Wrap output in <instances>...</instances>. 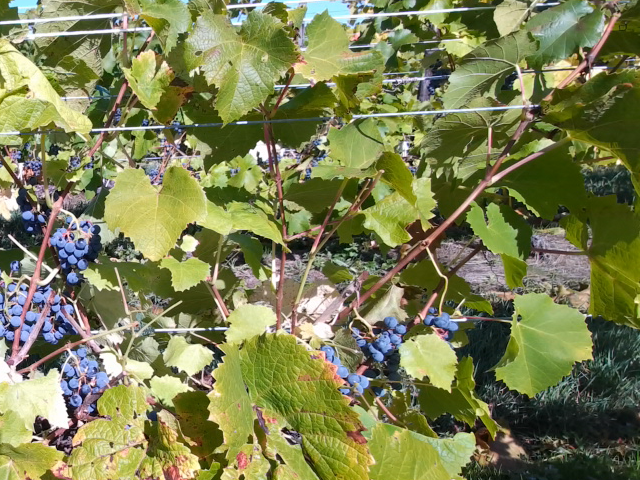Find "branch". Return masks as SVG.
Segmentation results:
<instances>
[{
	"label": "branch",
	"mask_w": 640,
	"mask_h": 480,
	"mask_svg": "<svg viewBox=\"0 0 640 480\" xmlns=\"http://www.w3.org/2000/svg\"><path fill=\"white\" fill-rule=\"evenodd\" d=\"M106 139V134L102 133L101 136L98 138V140L96 141V143L94 144V146L91 148V150L88 152L89 156H93L94 153L98 150V148L100 147L101 143Z\"/></svg>",
	"instance_id": "1d269e1b"
},
{
	"label": "branch",
	"mask_w": 640,
	"mask_h": 480,
	"mask_svg": "<svg viewBox=\"0 0 640 480\" xmlns=\"http://www.w3.org/2000/svg\"><path fill=\"white\" fill-rule=\"evenodd\" d=\"M538 113L537 109H533L530 114L526 115L525 118H523L521 120V122L516 126V129L514 131V134L512 135L511 139L509 140L508 144L506 145V147L504 148L503 152L501 153V155L499 156V158L497 159L496 163L494 164L493 168L491 169L490 174L481 182L478 183V185L470 192V194L466 197V199L463 201V203L448 217L447 220L444 221V223L436 228L430 235V237H427L425 241H423L421 244H419L417 246V248L412 252L409 253L406 257H404L403 259L400 260L399 264L395 265L394 268L386 275L383 276L382 279H380L378 282L374 283L370 289L360 298L356 299L354 302H352L344 311H342L336 318H335V322L339 323L346 315H348L352 310H353V306H357L360 303L364 302L365 300H367L373 293L374 291L379 288L380 286H382L384 283L387 282V280L391 279L397 272L398 270L402 269L403 266L405 265V263H407L411 258L416 257L420 251L423 248V245H428L430 242H433L434 239L436 238V236L443 232L450 223L453 222V220L455 219V217L457 215H459L466 207L467 205L471 202V200L479 194L480 190L482 188H484L490 181L491 179L496 175V172L498 171L500 165L502 164V162L504 161L505 157L508 155L510 149L512 148L513 144L515 143L517 137L519 136V133L521 131V128L523 126H526L528 121L530 119H532L536 114Z\"/></svg>",
	"instance_id": "30e6481e"
},
{
	"label": "branch",
	"mask_w": 640,
	"mask_h": 480,
	"mask_svg": "<svg viewBox=\"0 0 640 480\" xmlns=\"http://www.w3.org/2000/svg\"><path fill=\"white\" fill-rule=\"evenodd\" d=\"M269 133H270V137H271L272 144H273V158H274V162H275V172H276V176H277V180H278L277 181V190H278V198H279L281 214H282L283 240L287 241L288 240V223H287L286 205H285V201H284L283 188H282L283 178H282V174H281V170H280V160H279V156H278V141H277V138H276V135H275V131H274V126L273 125L269 126Z\"/></svg>",
	"instance_id": "982ccf7c"
},
{
	"label": "branch",
	"mask_w": 640,
	"mask_h": 480,
	"mask_svg": "<svg viewBox=\"0 0 640 480\" xmlns=\"http://www.w3.org/2000/svg\"><path fill=\"white\" fill-rule=\"evenodd\" d=\"M280 264H281L280 276H279L278 285H277L278 310H277L276 319H275V327L277 329L281 328L280 321H281L282 312H283L282 287H283V282H284V278H285V271H286V267H287L286 251L285 250L281 251Z\"/></svg>",
	"instance_id": "ea751061"
},
{
	"label": "branch",
	"mask_w": 640,
	"mask_h": 480,
	"mask_svg": "<svg viewBox=\"0 0 640 480\" xmlns=\"http://www.w3.org/2000/svg\"><path fill=\"white\" fill-rule=\"evenodd\" d=\"M619 19L618 15H614L612 20L610 21L609 25L607 26V28L605 29V32L601 38V40L597 43V45L586 55V57L575 67L574 71L565 79L563 80L560 84L559 87L563 88L565 87L570 81H572L579 73V71L586 65V63L591 59L592 56H594L604 45V43L606 42L607 38L609 37L612 28L614 27V25L617 23V20Z\"/></svg>",
	"instance_id": "1ff4a987"
},
{
	"label": "branch",
	"mask_w": 640,
	"mask_h": 480,
	"mask_svg": "<svg viewBox=\"0 0 640 480\" xmlns=\"http://www.w3.org/2000/svg\"><path fill=\"white\" fill-rule=\"evenodd\" d=\"M127 86H128V82H127V81H124V82L122 83V85H121L120 92H119V94H118V96H117V99H116V101H115V103H114V105H113V107H112V110H111V112L109 113V115H108V117H107V120H106V122H105V126H106V127H109V126H110V124H111V122H112V120H113V117H114V115L116 114V112H117V110H118V108H119V106H120V103H121V101H122V98H123V96H124V94H125V92H126V88H127Z\"/></svg>",
	"instance_id": "ca6c30ca"
},
{
	"label": "branch",
	"mask_w": 640,
	"mask_h": 480,
	"mask_svg": "<svg viewBox=\"0 0 640 480\" xmlns=\"http://www.w3.org/2000/svg\"><path fill=\"white\" fill-rule=\"evenodd\" d=\"M137 326H138L137 322L129 323V324H126V325H119V326H116V327L110 329L109 331H104L102 333H97V334H95L93 336L81 339L80 341L69 343L68 345H65V346H63V347H61L59 349H56L54 352L46 355L45 357L39 359L38 361H36V362H34L32 364H29L28 366H26V367H24L22 369H19L18 373L19 374L27 373L28 371H31L32 369H34L36 367H39L43 363L48 362L49 360L53 359L54 357L58 356L59 354H61L63 352H66V351H68V350H70V349H72L74 347H79V346H82V345H84L86 343L95 341L97 339H102L104 337L111 336L112 334H115L116 332H119L121 330H128V329H131V328H135Z\"/></svg>",
	"instance_id": "45aa463d"
},
{
	"label": "branch",
	"mask_w": 640,
	"mask_h": 480,
	"mask_svg": "<svg viewBox=\"0 0 640 480\" xmlns=\"http://www.w3.org/2000/svg\"><path fill=\"white\" fill-rule=\"evenodd\" d=\"M71 187H72V183L71 182H68L66 184V186L64 187V190L62 191V193L60 195V198H59V200L57 202L55 210L53 211V214H52V216H51V218L49 220V223H48V225L46 227L45 234H44V237L42 239V245H41L40 251L38 253L36 267H35V271H34V274H33L32 281H31V286L28 289L27 300H26V303H25V307H24V309L22 311L21 321H20L18 329H16L15 332H14V348H13V352H12V358L13 359L17 358V354H18V350H19V335L24 330V327H25V324H26L27 313L30 310L32 297H33V292L36 289V284H37L38 277H39V274H40L42 259H43V256H44V253H45V250H46V247H47V242H48V239H49V236H50V233H51V229H52V227H53V225H54V223L56 221V218L58 217V214H59V212H60V210L62 208V205H63V202L65 200V197H66L67 193L69 192V190L71 189Z\"/></svg>",
	"instance_id": "325d2c04"
},
{
	"label": "branch",
	"mask_w": 640,
	"mask_h": 480,
	"mask_svg": "<svg viewBox=\"0 0 640 480\" xmlns=\"http://www.w3.org/2000/svg\"><path fill=\"white\" fill-rule=\"evenodd\" d=\"M350 180L349 176H345L343 178V180L340 182L339 187H338V191L334 196V200L332 205L329 207V210L327 211V214L325 216V220L322 223V226L320 227V230L318 231V233L315 235L313 242H312V246L309 252V260L307 263V267L303 273L302 276V280L299 286V289L297 291V296L293 301V305H292V320L290 323V334L294 335L295 334V326H296V322H297V308H298V303L302 298V293L304 291V288L306 286V282L308 279V275L312 269L313 263H314V254L317 248V244L319 239L322 237V235L324 234L328 223L330 222V218L332 216V213L334 212V209L337 207V205L339 204L340 201V196L343 193L344 190V186L345 184Z\"/></svg>",
	"instance_id": "170604dd"
}]
</instances>
